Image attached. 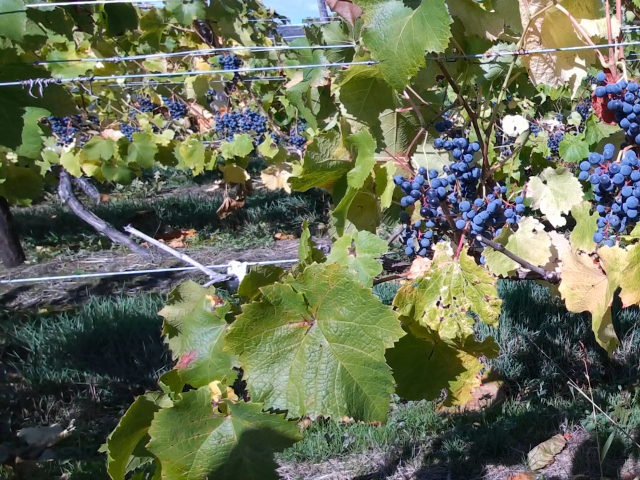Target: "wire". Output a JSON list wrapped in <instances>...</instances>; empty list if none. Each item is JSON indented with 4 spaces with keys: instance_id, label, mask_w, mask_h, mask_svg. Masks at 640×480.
Here are the masks:
<instances>
[{
    "instance_id": "obj_1",
    "label": "wire",
    "mask_w": 640,
    "mask_h": 480,
    "mask_svg": "<svg viewBox=\"0 0 640 480\" xmlns=\"http://www.w3.org/2000/svg\"><path fill=\"white\" fill-rule=\"evenodd\" d=\"M374 60H360V61H330L320 64H307V65H268L260 67H247L244 69H196V70H184L177 72L167 73H119V74H103L99 76H76V77H58L51 79H36V80H22L19 82H0V87H21L25 85H38V84H53L61 82H78V81H101L105 79H121V78H170L187 75L198 74H246L249 72H260L270 70H309V69H322L332 66H362V65H374Z\"/></svg>"
},
{
    "instance_id": "obj_2",
    "label": "wire",
    "mask_w": 640,
    "mask_h": 480,
    "mask_svg": "<svg viewBox=\"0 0 640 480\" xmlns=\"http://www.w3.org/2000/svg\"><path fill=\"white\" fill-rule=\"evenodd\" d=\"M354 44H306V45H262L243 47H217L201 48L190 50H179L171 52H153L129 56H109V57H86V58H49L42 60L27 61V66L45 65L52 63H88V62H112L131 61L155 57H173L181 55L219 53V52H245V51H265V50H308V49H354Z\"/></svg>"
},
{
    "instance_id": "obj_3",
    "label": "wire",
    "mask_w": 640,
    "mask_h": 480,
    "mask_svg": "<svg viewBox=\"0 0 640 480\" xmlns=\"http://www.w3.org/2000/svg\"><path fill=\"white\" fill-rule=\"evenodd\" d=\"M637 45H640V40L616 41L615 43H609V44L578 45V46H571V47H553V48H545V49H526V50L506 49L504 51H496V52L449 53V54H443V55L429 56L426 58V61L432 62V61L446 60L451 58L498 57V56H507L509 54L538 55V54H548V53H555V52H574V51H580V50L611 49V48H617L618 46H637Z\"/></svg>"
},
{
    "instance_id": "obj_4",
    "label": "wire",
    "mask_w": 640,
    "mask_h": 480,
    "mask_svg": "<svg viewBox=\"0 0 640 480\" xmlns=\"http://www.w3.org/2000/svg\"><path fill=\"white\" fill-rule=\"evenodd\" d=\"M196 266H177L167 267L156 270H127L124 272H105V273H77V274H63L53 275L46 277H27L16 279H0V284H18V283H30V282H49L65 279H80V278H108V277H134L139 275H158L166 274L170 272L180 271H196Z\"/></svg>"
}]
</instances>
